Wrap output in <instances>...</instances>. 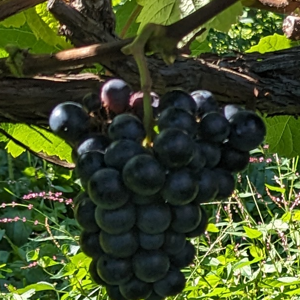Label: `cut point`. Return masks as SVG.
Segmentation results:
<instances>
[{"mask_svg":"<svg viewBox=\"0 0 300 300\" xmlns=\"http://www.w3.org/2000/svg\"><path fill=\"white\" fill-rule=\"evenodd\" d=\"M155 30L153 24H146L139 36H136L132 42L122 47L124 54H132L140 73L142 107H143V124L144 139L142 146L146 149L153 147V108L151 102V78L149 68L144 58V45Z\"/></svg>","mask_w":300,"mask_h":300,"instance_id":"6a23745f","label":"cut point"}]
</instances>
